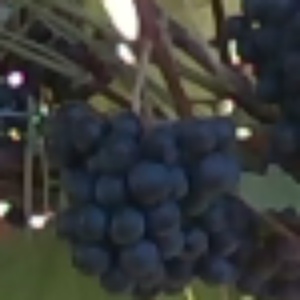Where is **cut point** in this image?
<instances>
[{
  "label": "cut point",
  "instance_id": "1",
  "mask_svg": "<svg viewBox=\"0 0 300 300\" xmlns=\"http://www.w3.org/2000/svg\"><path fill=\"white\" fill-rule=\"evenodd\" d=\"M143 39V49L140 60V69L136 76V82L131 95V110L137 119H142V90L146 81V74L149 69V53L152 43L146 37Z\"/></svg>",
  "mask_w": 300,
  "mask_h": 300
}]
</instances>
